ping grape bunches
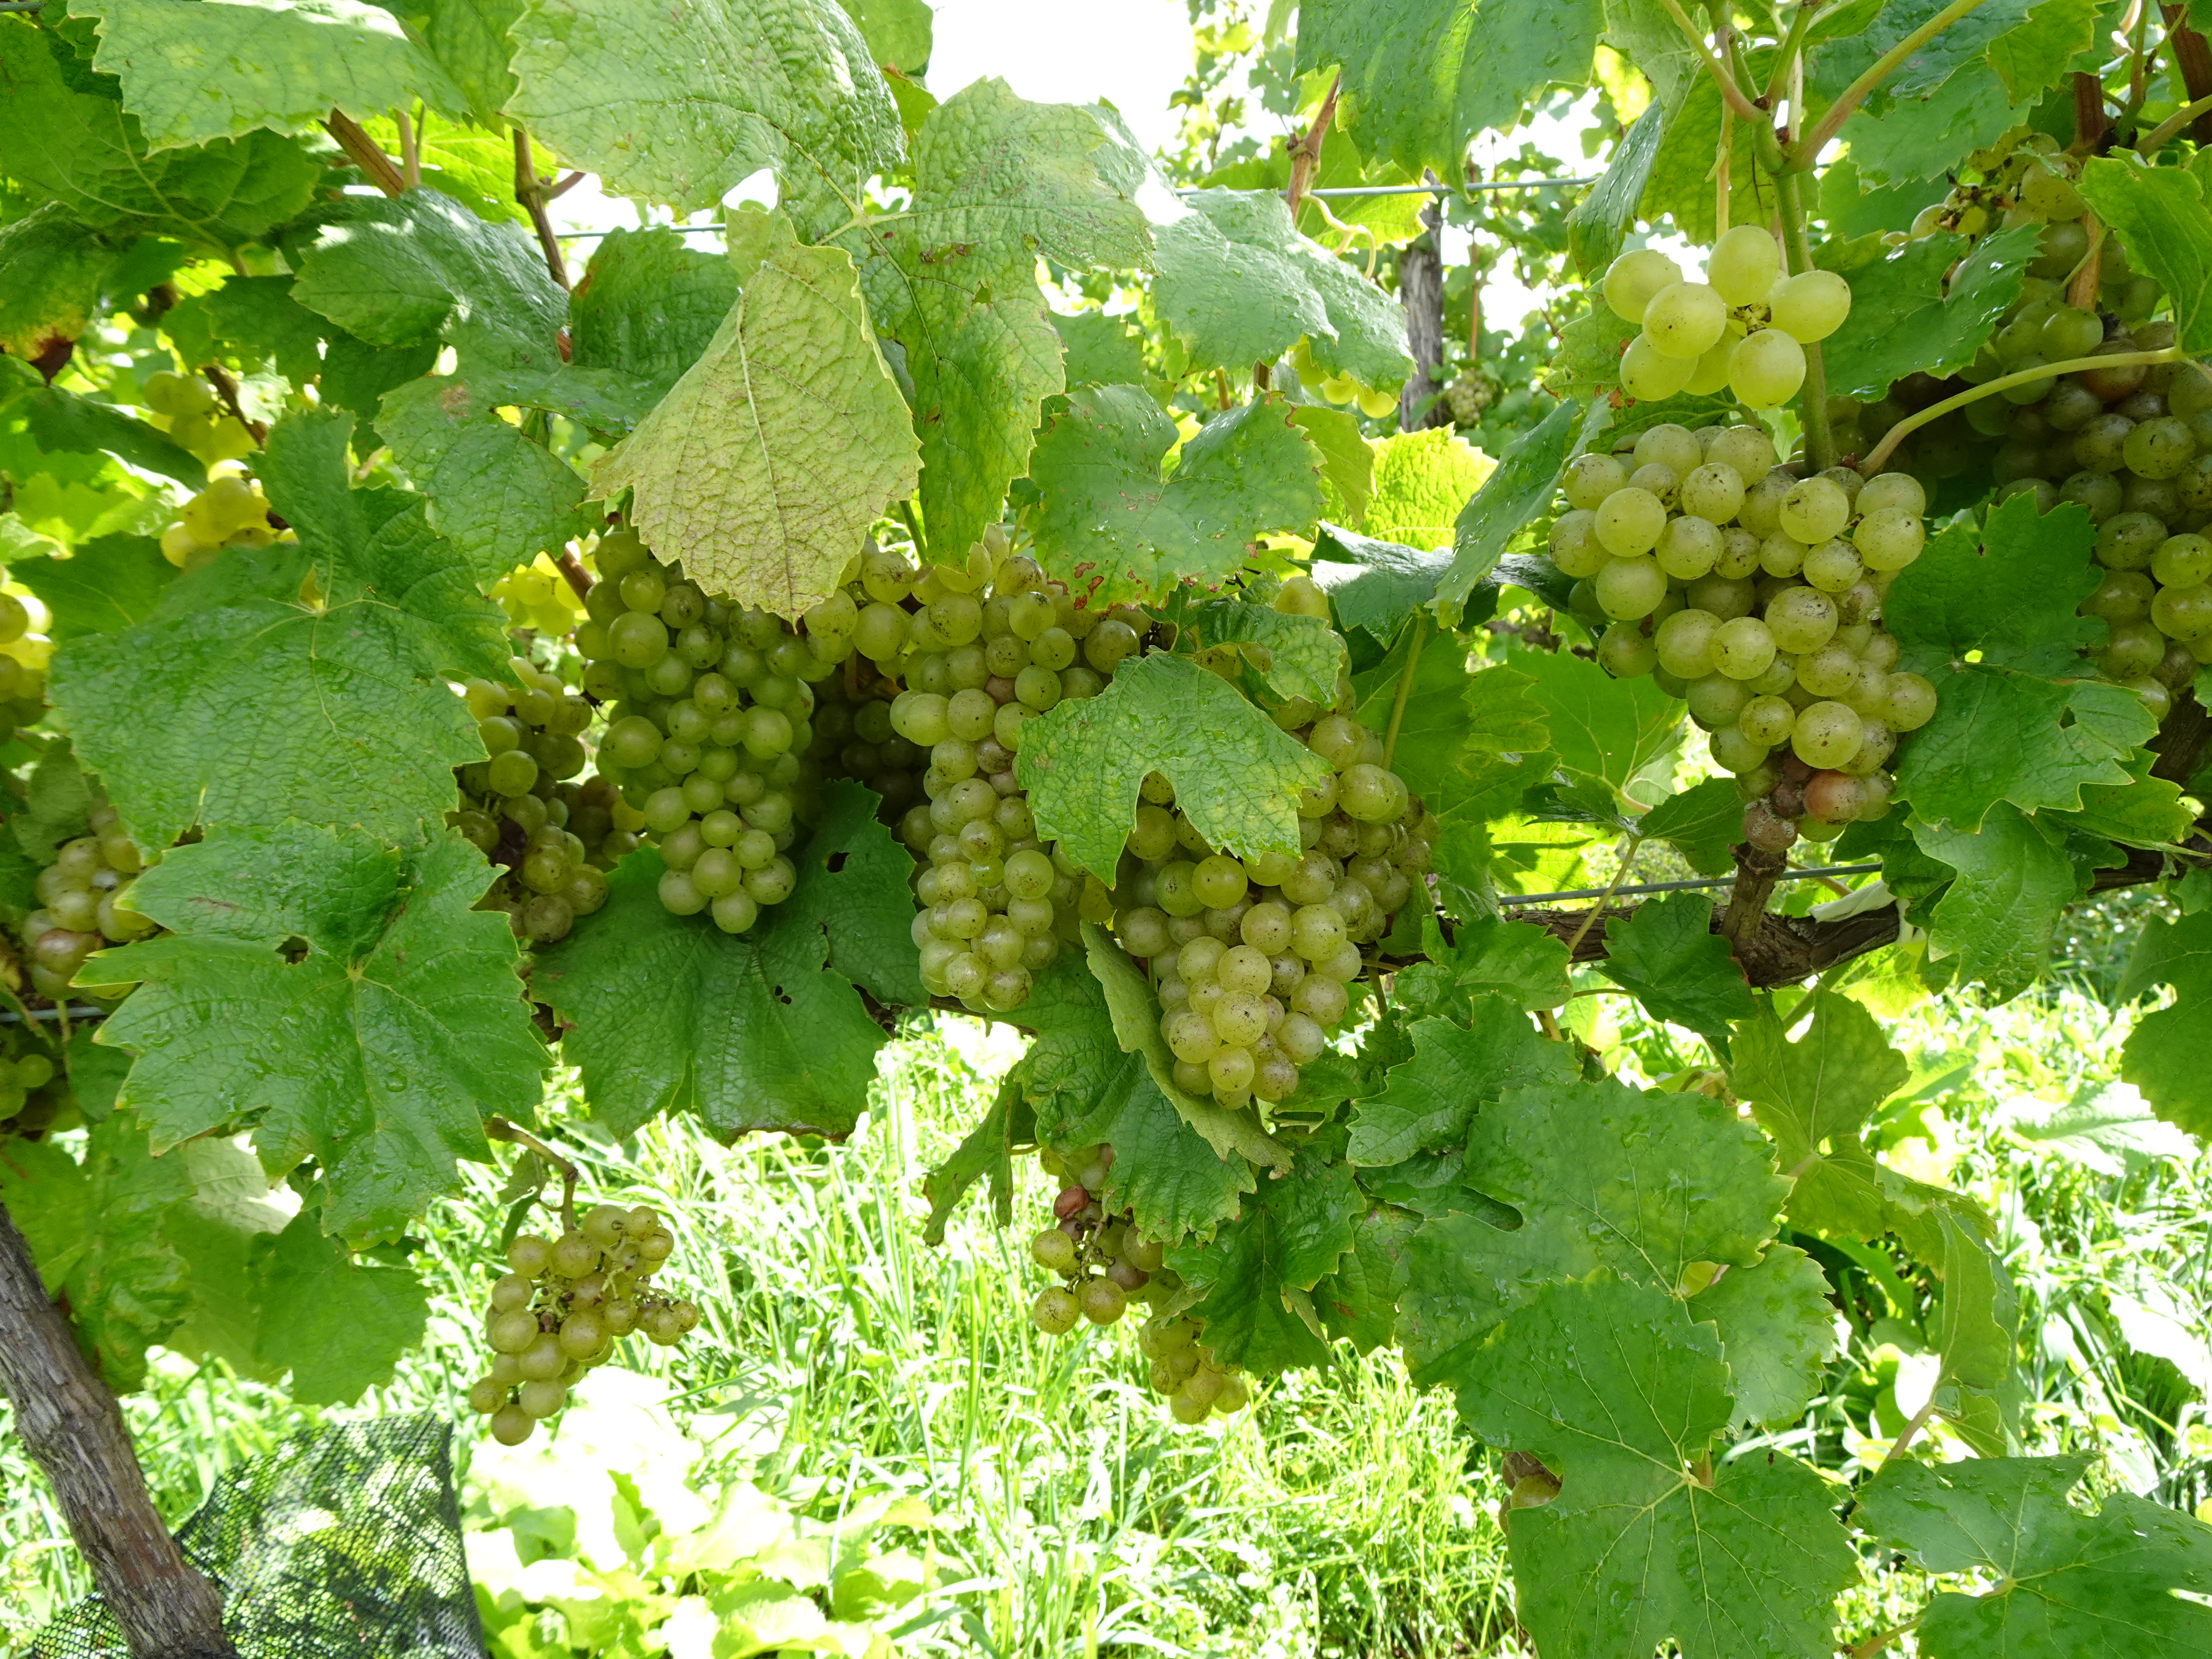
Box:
[0,1023,83,1132]
[451,657,591,854]
[467,1206,700,1446]
[470,528,601,640]
[23,799,156,1015]
[0,587,53,745]
[1790,370,1997,510]
[875,524,1155,1012]
[1999,413,2212,719]
[1447,368,1497,429]
[1602,224,1850,412]
[1138,1270,1249,1424]
[2150,524,2212,664]
[2126,362,2212,510]
[141,371,261,462]
[469,827,609,944]
[1487,1436,1567,1538]
[1995,322,2178,483]
[574,497,912,934]
[1209,576,1355,732]
[544,778,644,872]
[1107,716,1437,1109]
[1877,132,2163,433]
[1549,424,1938,854]
[1310,361,1401,419]
[1030,1142,1163,1335]
[801,668,933,811]
[160,477,300,568]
